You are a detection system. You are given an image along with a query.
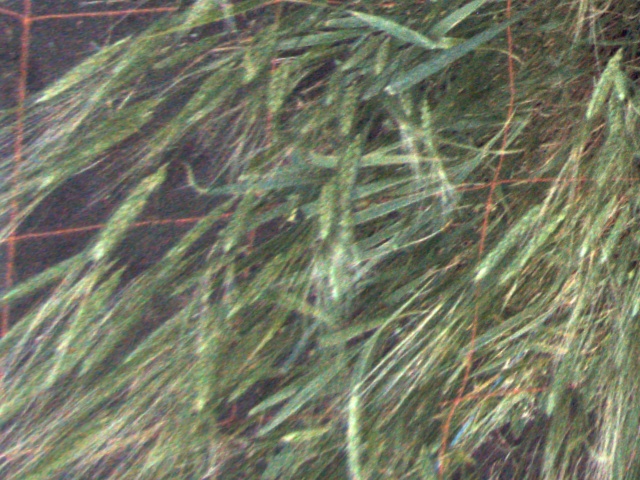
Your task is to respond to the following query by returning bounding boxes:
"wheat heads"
[580,198,608,249]
[252,33,282,76]
[507,212,565,281]
[325,318,383,347]
[347,398,363,466]
[339,138,361,200]
[225,188,253,248]
[160,37,218,66]
[394,70,412,110]
[472,208,545,279]
[23,412,130,479]
[11,250,81,297]
[243,166,295,179]
[185,0,217,23]
[230,360,277,401]
[588,50,624,109]
[234,252,294,315]
[378,37,393,74]
[284,432,328,445]
[604,211,630,260]
[58,271,119,340]
[75,105,154,167]
[249,201,293,225]
[340,212,351,247]
[46,39,125,97]
[339,36,373,70]
[328,263,345,301]
[266,60,298,108]
[177,195,234,252]
[317,183,337,230]
[595,122,621,177]
[419,102,437,142]
[548,361,571,408]
[91,173,166,261]
[339,86,360,134]
[185,68,225,116]
[196,308,223,408]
